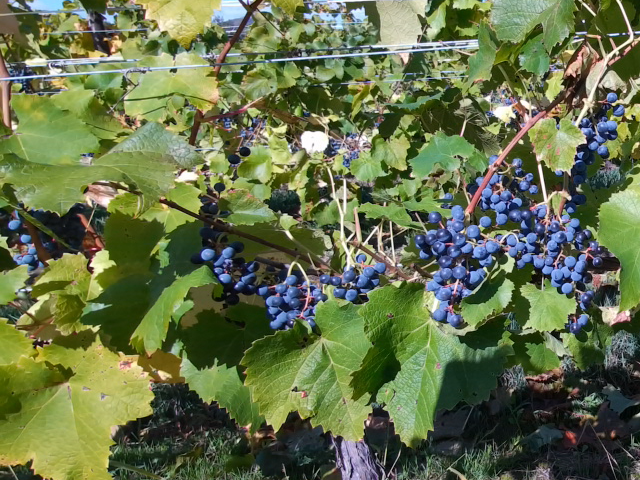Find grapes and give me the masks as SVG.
<instances>
[{
	"mask_svg": "<svg viewBox=\"0 0 640 480\" xmlns=\"http://www.w3.org/2000/svg\"><path fill=\"white\" fill-rule=\"evenodd\" d=\"M524 164V160L519 157H515L512 161V166L517 168L514 171V174L517 178H521L523 176V180L518 184V189L521 192H526L527 190L531 195H536L539 192V187L536 184H531L534 179V174L532 172H527L524 175V170L522 169Z\"/></svg>",
	"mask_w": 640,
	"mask_h": 480,
	"instance_id": "grapes-7",
	"label": "grapes"
},
{
	"mask_svg": "<svg viewBox=\"0 0 640 480\" xmlns=\"http://www.w3.org/2000/svg\"><path fill=\"white\" fill-rule=\"evenodd\" d=\"M618 95L616 92H609L606 94V100L608 103L601 105V109L594 115L597 121V132L592 128V123L589 118H583L580 125L581 131L586 135V145H582L577 150V159L574 164V168L571 169L572 183L574 185H582L587 178V166H591L596 162V157L593 152L597 151L599 156H607L609 154V148L604 144L607 140H615L618 136V124L615 121L608 120L607 112L611 109V105L616 103Z\"/></svg>",
	"mask_w": 640,
	"mask_h": 480,
	"instance_id": "grapes-4",
	"label": "grapes"
},
{
	"mask_svg": "<svg viewBox=\"0 0 640 480\" xmlns=\"http://www.w3.org/2000/svg\"><path fill=\"white\" fill-rule=\"evenodd\" d=\"M343 271L345 273L342 275V278L340 276L321 275L319 281L322 284L337 287L332 290L335 298H345L348 302H354L357 298L358 291L360 293L370 292L380 283V276L378 274H384L387 271V267L383 262H376L372 268L365 267L362 270V275L357 276L353 266H345Z\"/></svg>",
	"mask_w": 640,
	"mask_h": 480,
	"instance_id": "grapes-5",
	"label": "grapes"
},
{
	"mask_svg": "<svg viewBox=\"0 0 640 480\" xmlns=\"http://www.w3.org/2000/svg\"><path fill=\"white\" fill-rule=\"evenodd\" d=\"M504 179L502 174H494L488 183V186L481 193L479 207L482 211L488 209L496 212V223L499 226H505L509 221L512 223L520 222V229L516 237L508 234L505 237V243L509 247L508 255L516 258L519 252L522 254L514 263L517 270H522L526 264H533L536 269H542V273L550 276L551 285L553 287H561V292L565 295L573 291V285L567 283L563 279H568L574 283H589L592 280V274L585 271L590 264V260L584 253H579L577 259L574 256L566 257L562 263L558 262L556 267L555 258L561 253L562 245L574 242L577 250H583L584 241L592 238V232L588 228L580 227L578 218H570L569 215H562L561 220L564 224H568L566 231L561 230V223L558 220H552L547 230L550 232L547 236L546 256L532 255L538 252L539 236L545 233V226L541 223V219L547 217L548 206L546 204L539 205L534 210L521 209L523 200L521 198L512 199L510 190H503L500 195L493 194L492 188L494 184H499Z\"/></svg>",
	"mask_w": 640,
	"mask_h": 480,
	"instance_id": "grapes-1",
	"label": "grapes"
},
{
	"mask_svg": "<svg viewBox=\"0 0 640 480\" xmlns=\"http://www.w3.org/2000/svg\"><path fill=\"white\" fill-rule=\"evenodd\" d=\"M587 202V197L584 194L574 195L572 200L566 203L565 212L567 214H573L576 211V205H582Z\"/></svg>",
	"mask_w": 640,
	"mask_h": 480,
	"instance_id": "grapes-9",
	"label": "grapes"
},
{
	"mask_svg": "<svg viewBox=\"0 0 640 480\" xmlns=\"http://www.w3.org/2000/svg\"><path fill=\"white\" fill-rule=\"evenodd\" d=\"M14 218V220H11L8 223V229L11 232H19L20 242L30 248L27 255H15L13 257L14 263L17 266L28 265L27 271L29 273H32L37 269H44L46 264L39 259L37 250L32 247L33 243L31 233L27 229H23V223L26 221V218L21 215L19 210L14 212Z\"/></svg>",
	"mask_w": 640,
	"mask_h": 480,
	"instance_id": "grapes-6",
	"label": "grapes"
},
{
	"mask_svg": "<svg viewBox=\"0 0 640 480\" xmlns=\"http://www.w3.org/2000/svg\"><path fill=\"white\" fill-rule=\"evenodd\" d=\"M451 217L455 220L448 219L445 222V228L429 229L426 234H419L414 237V247L421 249L418 253L420 260H430L434 256L437 257V264L441 268L437 270L426 285V289L433 296L442 301L437 309L431 312V318L435 322L446 321L453 328H459L464 323L461 315H455L449 309L452 293L457 297L464 298L474 291L483 279L486 277V270L483 267H489L492 264L493 253L500 250V243L504 236L496 234L495 240H488L484 247H475L466 242V236L469 239H475L478 244L484 242L481 236L480 228L477 225H469L466 228L465 235L461 233L465 229L464 207L461 205L441 204L440 209H450ZM462 254H471L473 259H477V264L481 267L474 268L470 266L468 269L461 264L454 265L456 260Z\"/></svg>",
	"mask_w": 640,
	"mask_h": 480,
	"instance_id": "grapes-2",
	"label": "grapes"
},
{
	"mask_svg": "<svg viewBox=\"0 0 640 480\" xmlns=\"http://www.w3.org/2000/svg\"><path fill=\"white\" fill-rule=\"evenodd\" d=\"M245 250L243 242H232L230 245L224 246L220 250V254L214 249L204 248L199 253H195L189 257L191 265L204 264L212 260L213 273L217 276L218 281L222 285H228L231 282V276L224 272L230 263L241 268L243 274L240 280H236L232 284V290L235 295L253 296L265 299L264 306L268 308L267 316L271 320L269 328L277 330L282 325L285 329H289L296 323V317L302 312L303 291L309 288V295L312 297L309 305L302 313L303 320L311 327L316 325L313 317L315 316L316 304L318 301L326 302L328 296L313 283L303 280L300 271H292L290 274L287 268H283L279 273V279L285 283H279L274 288H270L267 284H263L256 288L254 282L258 280L256 271L261 267V263L257 260H250L246 263L243 257H235L236 254Z\"/></svg>",
	"mask_w": 640,
	"mask_h": 480,
	"instance_id": "grapes-3",
	"label": "grapes"
},
{
	"mask_svg": "<svg viewBox=\"0 0 640 480\" xmlns=\"http://www.w3.org/2000/svg\"><path fill=\"white\" fill-rule=\"evenodd\" d=\"M589 321V316L587 314H580L577 317V322H573V321H569L566 325V328L572 333V334H577L579 333L583 327L588 323Z\"/></svg>",
	"mask_w": 640,
	"mask_h": 480,
	"instance_id": "grapes-8",
	"label": "grapes"
},
{
	"mask_svg": "<svg viewBox=\"0 0 640 480\" xmlns=\"http://www.w3.org/2000/svg\"><path fill=\"white\" fill-rule=\"evenodd\" d=\"M482 177H483V176H478V177L476 178V180H475V183H474V184H468V185L466 186V191H467L471 196L473 195L474 190H475V189L479 186V184L481 183Z\"/></svg>",
	"mask_w": 640,
	"mask_h": 480,
	"instance_id": "grapes-10",
	"label": "grapes"
}]
</instances>
